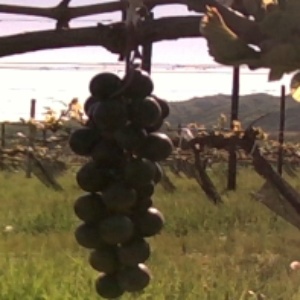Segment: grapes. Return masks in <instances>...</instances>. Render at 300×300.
<instances>
[{
	"label": "grapes",
	"mask_w": 300,
	"mask_h": 300,
	"mask_svg": "<svg viewBox=\"0 0 300 300\" xmlns=\"http://www.w3.org/2000/svg\"><path fill=\"white\" fill-rule=\"evenodd\" d=\"M153 89L150 74L141 69L123 79L112 72L96 74L84 104L89 119L68 137L70 149L89 158L77 174L79 186L89 193L74 203L77 217L85 221L75 238L82 247L94 249L89 263L105 273L96 278L94 289L104 299L148 287L150 276L139 267L150 255L143 237L165 225L162 211L151 207V196L163 177L155 162L171 154L173 142L157 131L169 106L151 94Z\"/></svg>",
	"instance_id": "obj_1"
}]
</instances>
